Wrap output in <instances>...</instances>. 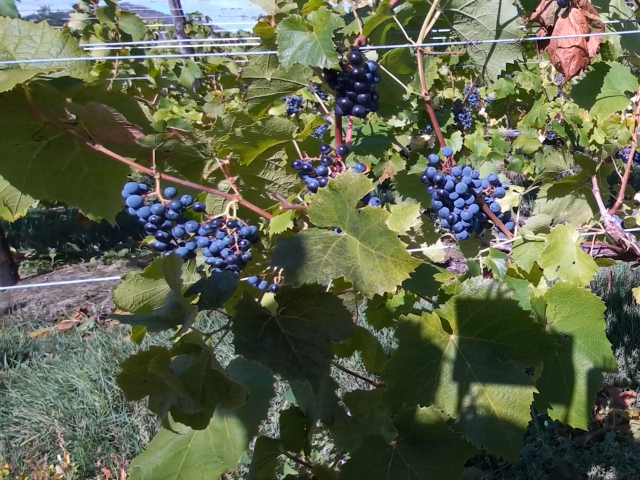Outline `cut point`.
<instances>
[{
  "label": "cut point",
  "mask_w": 640,
  "mask_h": 480,
  "mask_svg": "<svg viewBox=\"0 0 640 480\" xmlns=\"http://www.w3.org/2000/svg\"><path fill=\"white\" fill-rule=\"evenodd\" d=\"M231 205H232V209H233V217H236V215H237L236 202H232V201H230L227 204V207H226V209L224 211V215H230V207H231Z\"/></svg>",
  "instance_id": "cut-point-1"
}]
</instances>
